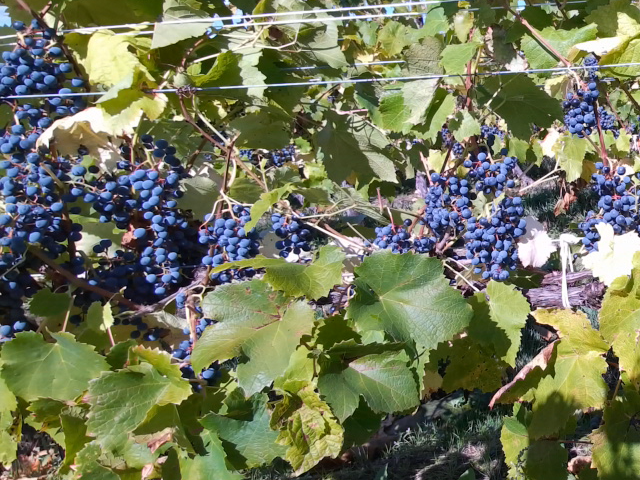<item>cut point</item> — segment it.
Segmentation results:
<instances>
[{"instance_id": "6a23745f", "label": "cut point", "mask_w": 640, "mask_h": 480, "mask_svg": "<svg viewBox=\"0 0 640 480\" xmlns=\"http://www.w3.org/2000/svg\"><path fill=\"white\" fill-rule=\"evenodd\" d=\"M229 201H231L233 203H237V200H235V199H233V198H231V197H229L228 195L225 194V203H226V205H227V207L229 209H232V206H231Z\"/></svg>"}]
</instances>
